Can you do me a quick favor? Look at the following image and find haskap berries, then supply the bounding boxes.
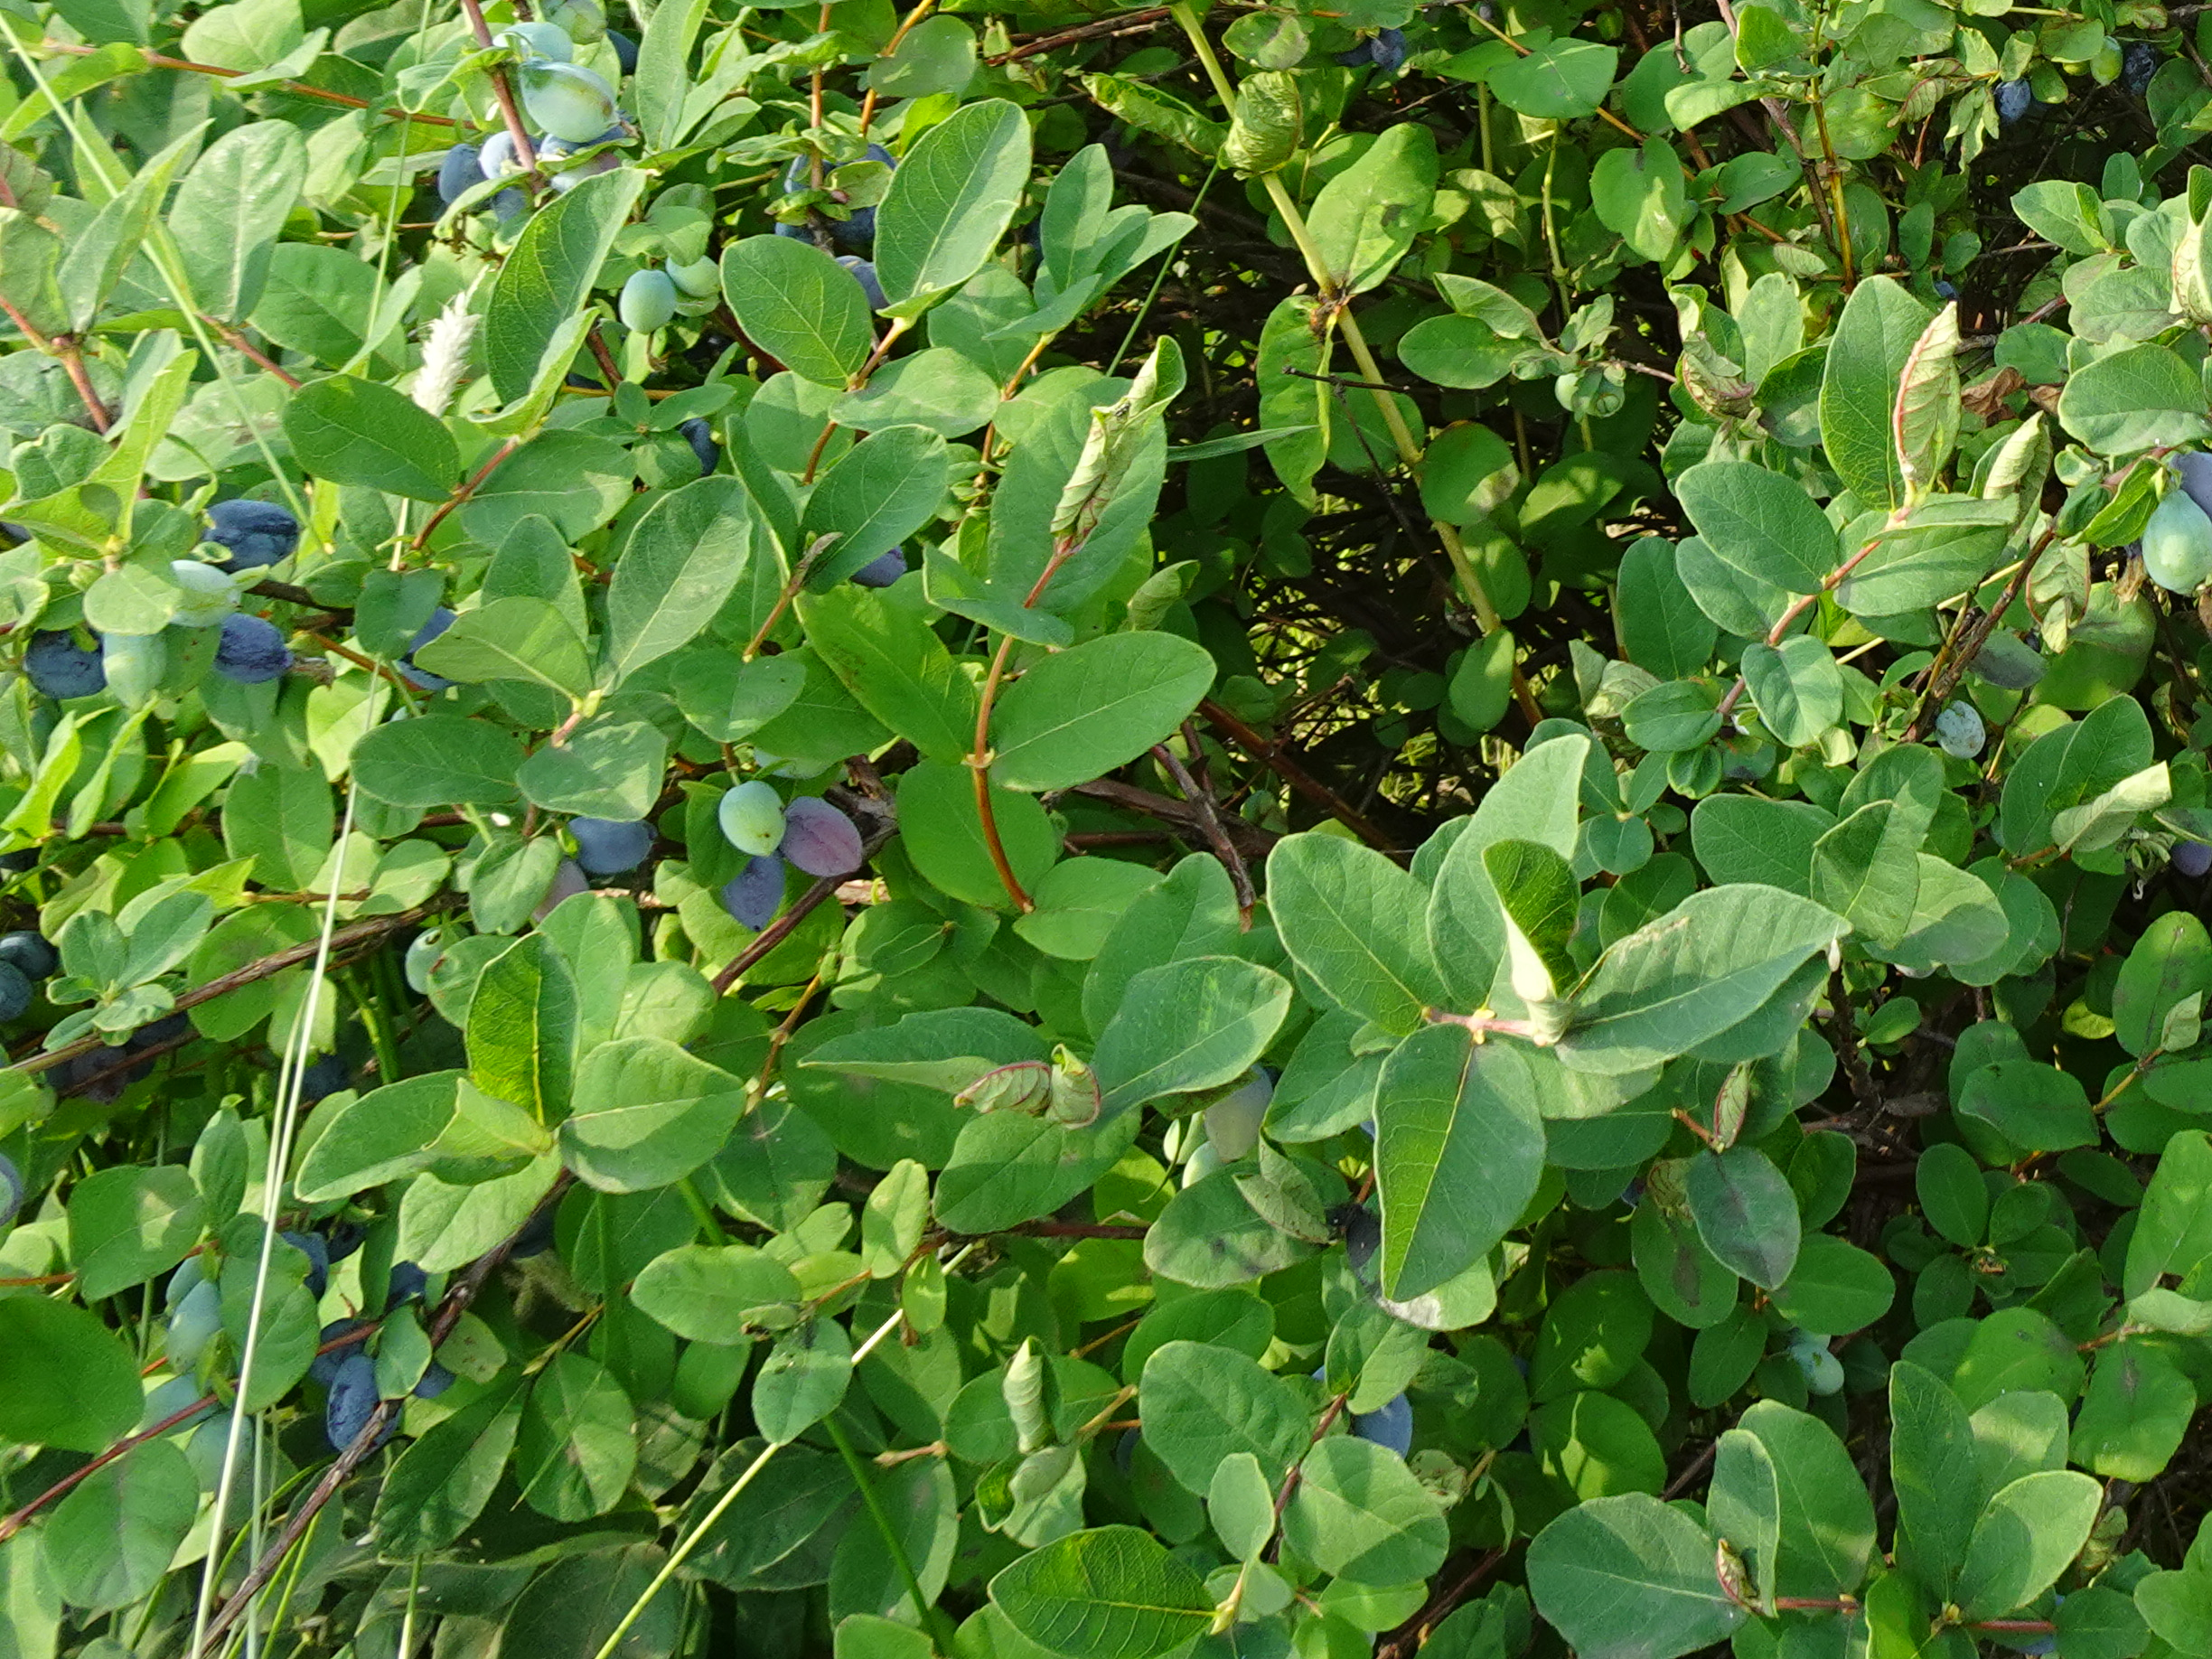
[45,1062,80,1095]
[1931,282,1960,304]
[720,782,786,857]
[667,252,727,297]
[851,543,904,586]
[781,795,862,875]
[1937,701,1985,757]
[407,921,469,995]
[165,1279,225,1367]
[571,814,654,874]
[123,1040,158,1081]
[1790,1343,1845,1393]
[2091,34,2123,84]
[304,1212,365,1265]
[480,131,541,183]
[72,1044,128,1106]
[535,0,608,43]
[1372,25,1408,70]
[391,604,469,692]
[541,123,630,159]
[1312,1363,1413,1461]
[210,608,293,678]
[1116,1424,1144,1471]
[138,1370,224,1438]
[832,258,890,322]
[0,961,31,1020]
[185,1407,254,1498]
[716,846,792,934]
[603,27,640,77]
[1363,1121,1377,1137]
[299,1052,351,1106]
[786,147,901,259]
[201,500,303,570]
[385,1262,425,1313]
[327,1353,398,1454]
[1030,213,1047,266]
[1557,371,1624,414]
[495,184,530,227]
[25,627,111,701]
[2143,490,2212,599]
[413,1361,459,1397]
[1181,1142,1230,1190]
[620,270,674,333]
[1790,1326,1829,1352]
[529,860,587,921]
[886,0,925,14]
[104,626,168,705]
[169,558,241,626]
[129,1009,186,1042]
[439,144,494,213]
[0,928,59,979]
[1623,1179,1649,1209]
[0,1153,21,1223]
[568,371,606,390]
[2170,842,2212,874]
[315,1321,365,1381]
[775,214,818,247]
[2062,59,2090,76]
[1202,1062,1272,1158]
[514,63,619,143]
[165,1254,211,1310]
[553,155,624,193]
[679,419,718,478]
[2022,1593,2066,1655]
[1995,78,2030,123]
[1163,1114,1208,1160]
[2174,443,2212,529]
[1334,36,1372,68]
[278,1231,328,1303]
[2126,40,2164,99]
